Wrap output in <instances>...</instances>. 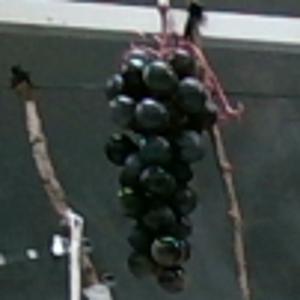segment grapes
<instances>
[{
  "label": "grapes",
  "instance_id": "1",
  "mask_svg": "<svg viewBox=\"0 0 300 300\" xmlns=\"http://www.w3.org/2000/svg\"><path fill=\"white\" fill-rule=\"evenodd\" d=\"M120 67L103 79L106 118L140 138L135 143L125 133H113L103 153L110 165L123 168L115 202L126 218L136 220L127 237L132 252L126 271L135 280L156 276L161 289L177 295L189 279L184 264L193 256L188 239L195 225L188 216L200 202L189 186L196 178L193 166L206 154L203 134L218 126L220 109L199 78V58L185 47L163 54L134 46Z\"/></svg>",
  "mask_w": 300,
  "mask_h": 300
}]
</instances>
